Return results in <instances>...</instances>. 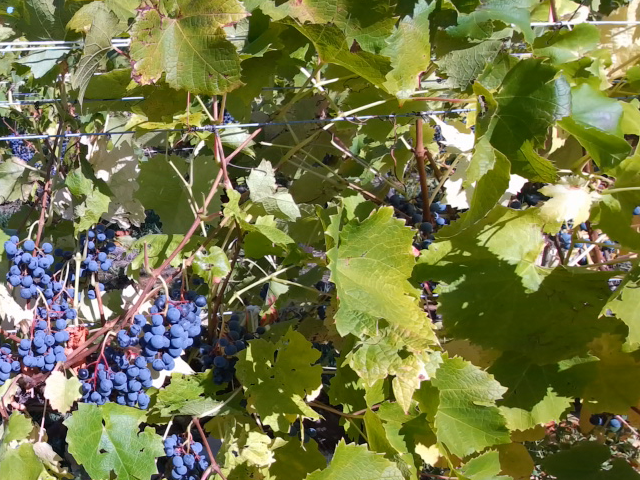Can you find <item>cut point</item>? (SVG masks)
Segmentation results:
<instances>
[{"instance_id": "1", "label": "cut point", "mask_w": 640, "mask_h": 480, "mask_svg": "<svg viewBox=\"0 0 640 480\" xmlns=\"http://www.w3.org/2000/svg\"><path fill=\"white\" fill-rule=\"evenodd\" d=\"M112 332H113V331H109V332H107V334H106V336H105V339H104V342H103V345H102V348H101V351H103V349L106 347V345H107V338L111 335V333H112Z\"/></svg>"}, {"instance_id": "2", "label": "cut point", "mask_w": 640, "mask_h": 480, "mask_svg": "<svg viewBox=\"0 0 640 480\" xmlns=\"http://www.w3.org/2000/svg\"><path fill=\"white\" fill-rule=\"evenodd\" d=\"M164 279H165V278H163V279H162V277H161V276H160V277H158V280H159V282L163 285L165 292H168V287H167V284L164 282Z\"/></svg>"}]
</instances>
